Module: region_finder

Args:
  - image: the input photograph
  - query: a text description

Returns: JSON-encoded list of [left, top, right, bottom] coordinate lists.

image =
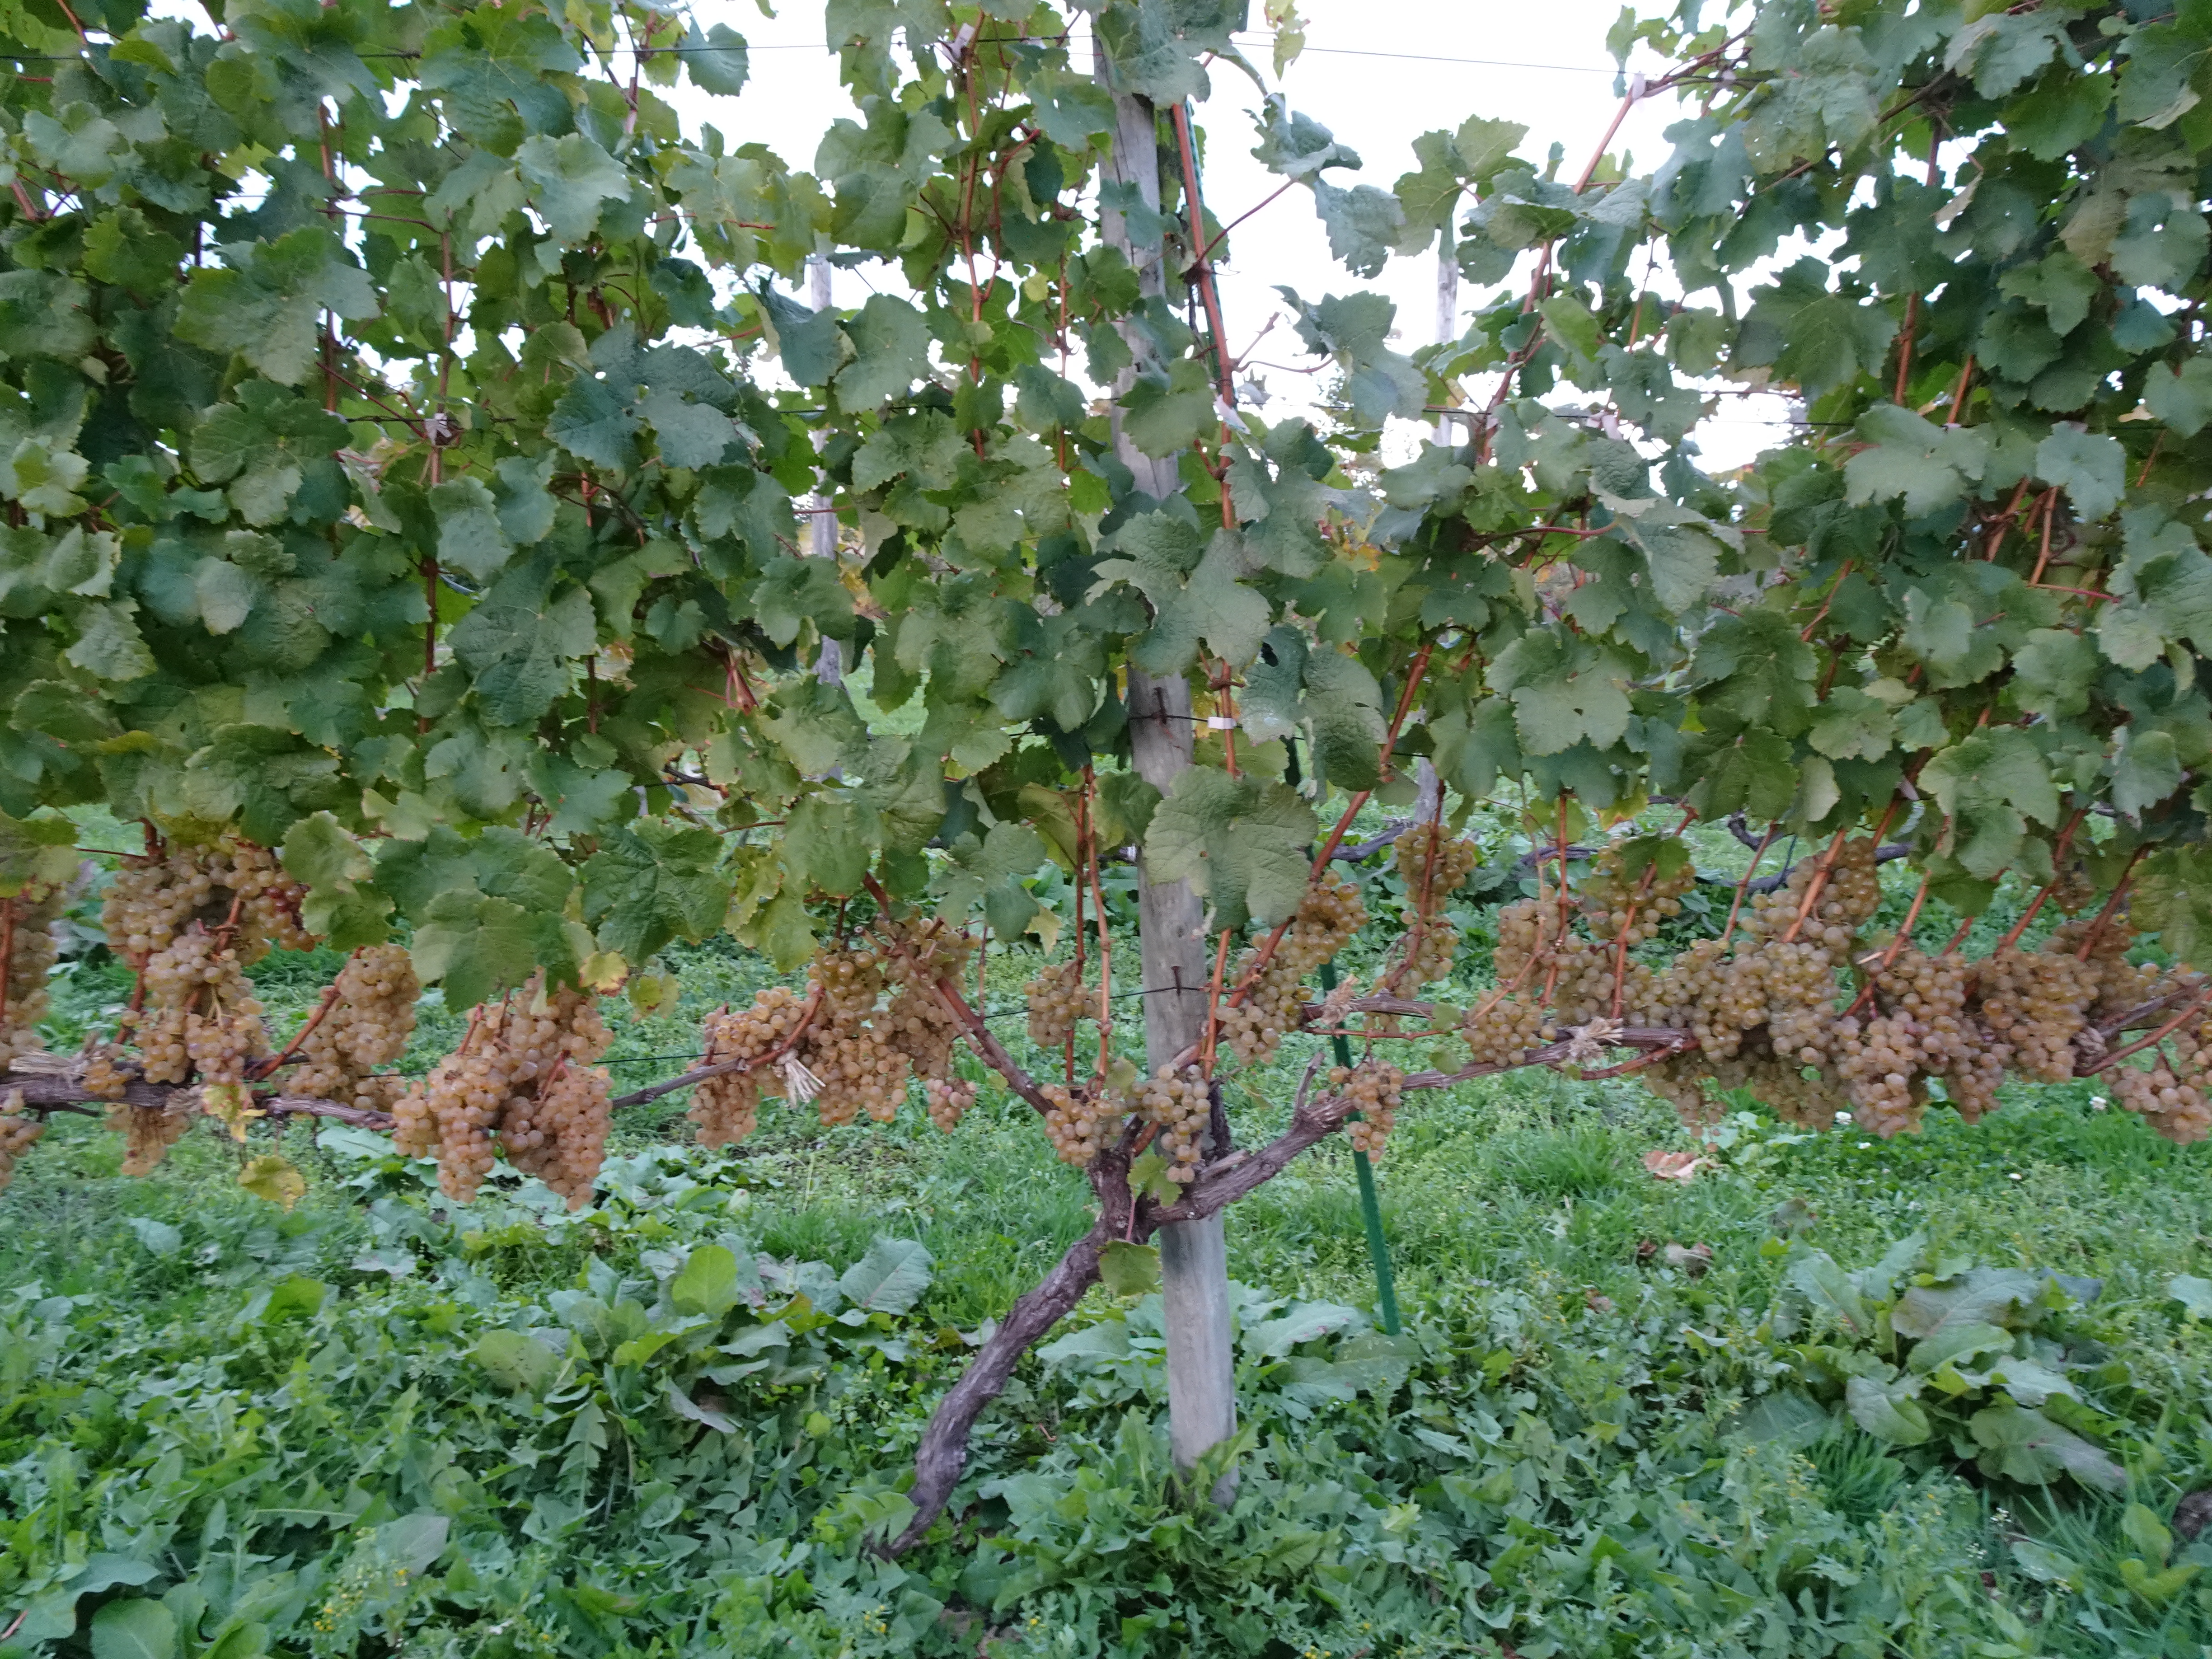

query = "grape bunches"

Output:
[[1550, 937, 1620, 1028], [122, 934, 220, 1081], [1645, 1063, 1727, 1160], [428, 1055, 504, 1216], [1133, 1063, 1214, 1181], [539, 1067, 616, 1179], [81, 1050, 128, 1099], [332, 943, 426, 1070], [924, 1077, 982, 1135], [351, 1071, 385, 1119], [1038, 1082, 1134, 1166], [1021, 957, 1105, 1049], [1213, 951, 1319, 1066], [1580, 834, 1701, 944], [0, 1086, 48, 1195], [2163, 953, 2212, 1096], [1835, 1020, 1932, 1140], [388, 1076, 434, 1170], [1739, 854, 1856, 966], [471, 978, 565, 1084], [558, 988, 623, 1092], [1668, 936, 1770, 1075], [801, 933, 884, 1036], [96, 838, 232, 966], [1856, 941, 1971, 1071], [1765, 940, 1859, 1059], [2, 990, 52, 1063], [2046, 866, 2096, 916], [1941, 1032, 2013, 1126], [799, 1032, 919, 1129], [1458, 988, 1559, 1069], [283, 981, 349, 1098], [699, 983, 803, 1101], [1315, 1059, 1410, 1167], [227, 848, 320, 957], [1384, 917, 1457, 1004], [1752, 1059, 1848, 1140], [182, 1023, 247, 1087], [502, 1095, 600, 1211], [1358, 1002, 1409, 1042], [2094, 952, 2162, 1016], [1618, 953, 1669, 1039], [2098, 1063, 2212, 1149], [1976, 944, 2106, 1086], [103, 1097, 201, 1166], [1489, 879, 1567, 995], [1283, 873, 1375, 976], [877, 914, 967, 1036], [686, 1058, 760, 1156], [200, 947, 273, 1060], [9, 867, 64, 1000], [1820, 835, 1884, 927], [1395, 817, 1481, 918], [911, 1028, 958, 1086]]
